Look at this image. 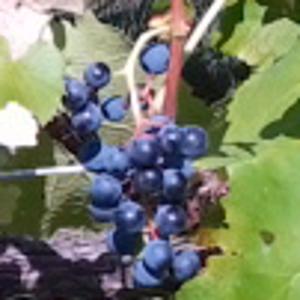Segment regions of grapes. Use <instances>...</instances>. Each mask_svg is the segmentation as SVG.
<instances>
[{"instance_id": "grapes-1", "label": "grapes", "mask_w": 300, "mask_h": 300, "mask_svg": "<svg viewBox=\"0 0 300 300\" xmlns=\"http://www.w3.org/2000/svg\"><path fill=\"white\" fill-rule=\"evenodd\" d=\"M114 74L105 61L88 64L83 84L72 75L63 79L67 92L62 106L73 110L69 129L81 141L75 158L85 171L98 175L91 187L90 210L101 224L114 223L108 245L118 254L134 258L128 267L132 283L142 290L175 292L203 269V256L193 248H175L172 242L188 223L183 207L197 171V161L208 152L211 132L204 124L175 123L155 114L127 144L112 145L95 133L102 120L115 123L128 114L123 94L100 101L99 88Z\"/></svg>"}, {"instance_id": "grapes-2", "label": "grapes", "mask_w": 300, "mask_h": 300, "mask_svg": "<svg viewBox=\"0 0 300 300\" xmlns=\"http://www.w3.org/2000/svg\"><path fill=\"white\" fill-rule=\"evenodd\" d=\"M169 43L160 41L145 46L139 55V66L150 76H164L169 67Z\"/></svg>"}]
</instances>
